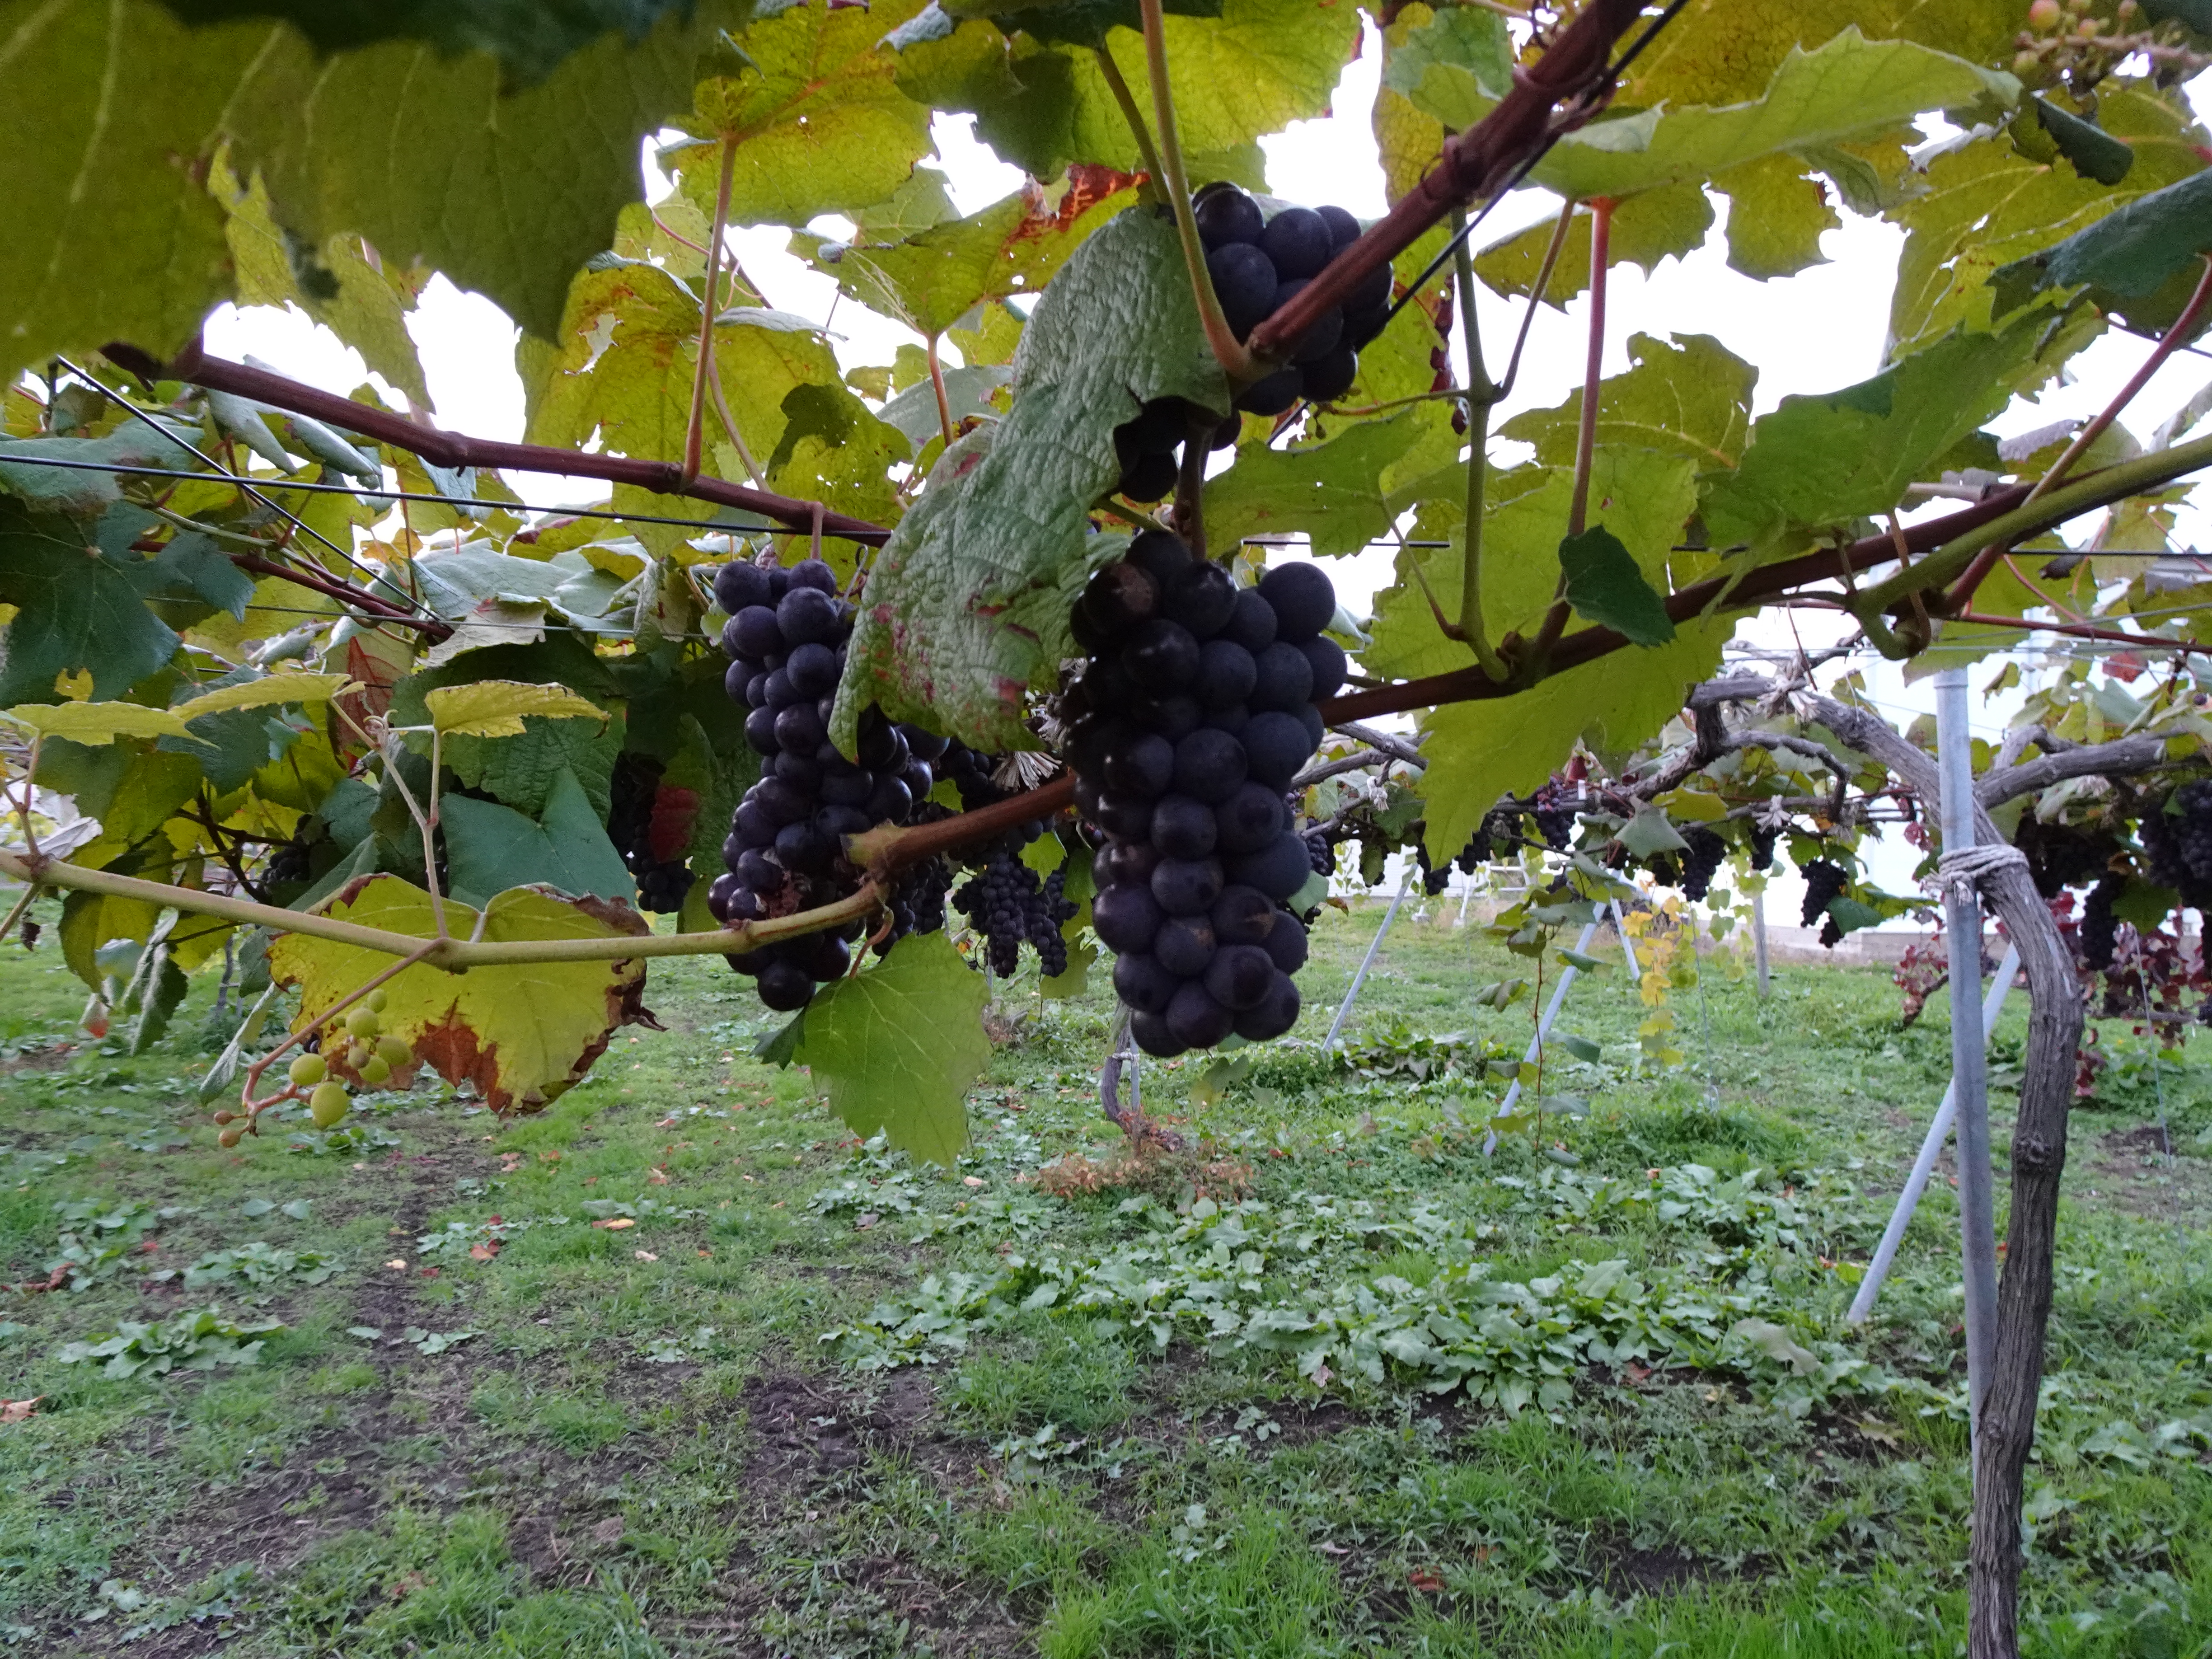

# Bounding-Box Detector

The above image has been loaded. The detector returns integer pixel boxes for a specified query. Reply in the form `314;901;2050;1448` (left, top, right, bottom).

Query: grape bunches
1676;823;1727;905
254;814;337;895
606;749;667;871
962;856;1041;975
706;641;952;1010
712;559;863;755
1091;181;1395;502
943;741;1059;863
629;790;696;914
425;820;448;900
1049;524;1349;1058
289;990;415;1149
1026;863;1080;975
